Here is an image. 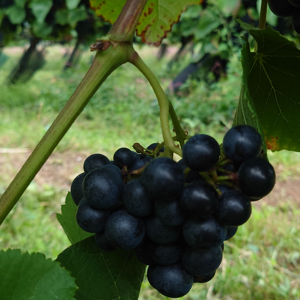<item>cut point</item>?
<instances>
[{"instance_id": "obj_1", "label": "cut point", "mask_w": 300, "mask_h": 300, "mask_svg": "<svg viewBox=\"0 0 300 300\" xmlns=\"http://www.w3.org/2000/svg\"><path fill=\"white\" fill-rule=\"evenodd\" d=\"M125 63H131L132 65H134L149 82L156 95L160 107V127L163 135L164 145H166L168 148L175 146L169 127V100L159 81L150 70V68L145 64L140 55L136 52L133 46L130 49Z\"/></svg>"}]
</instances>
